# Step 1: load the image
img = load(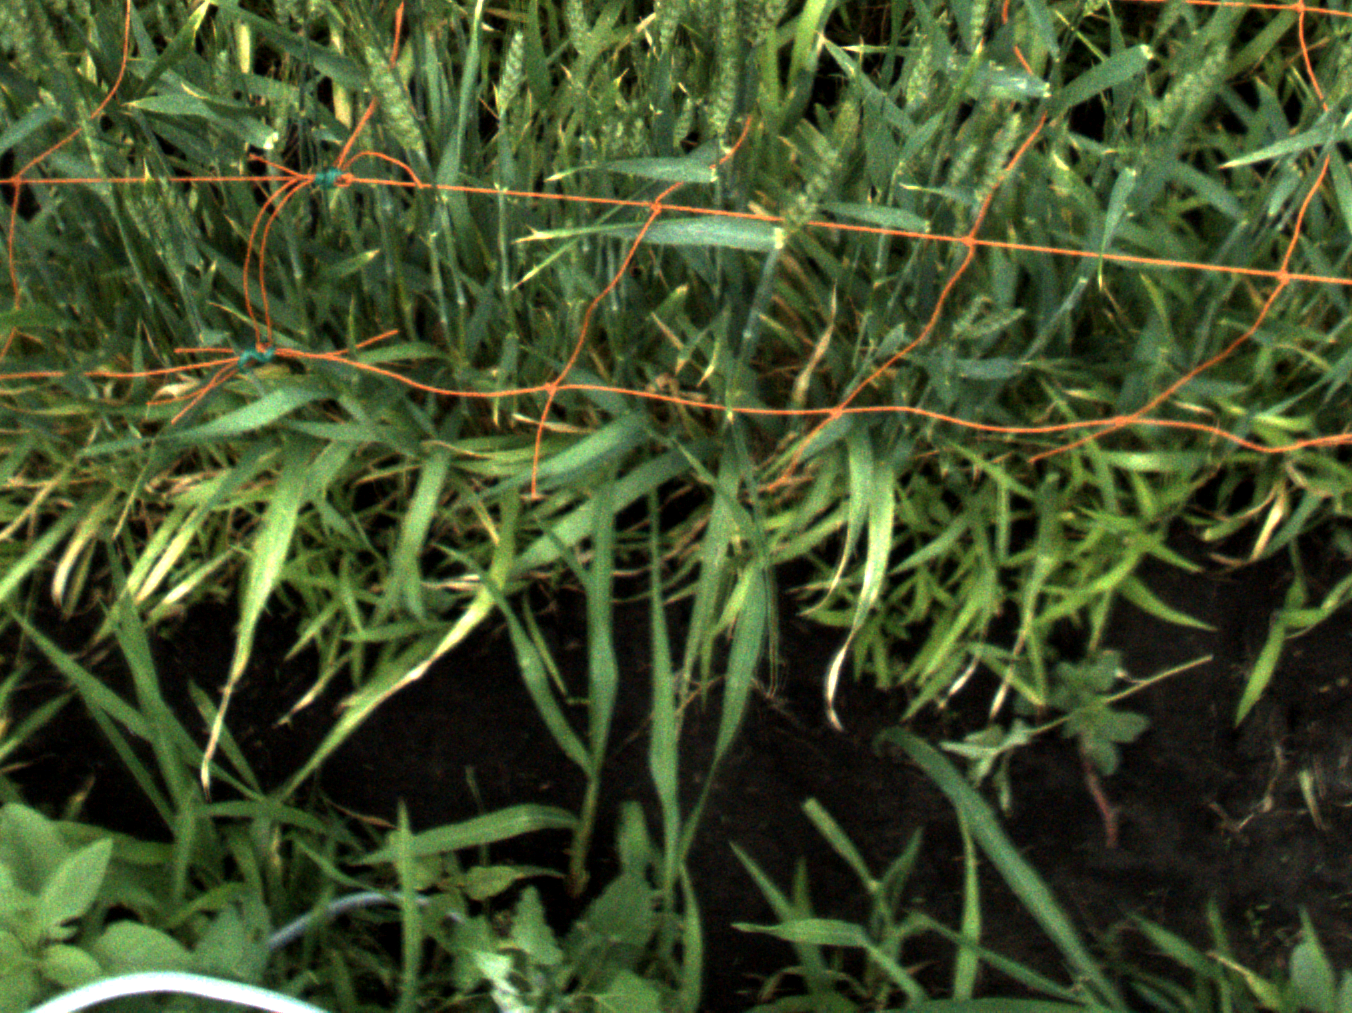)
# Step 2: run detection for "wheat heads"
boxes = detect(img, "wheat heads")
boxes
[1157,0,1187,38]
[495,27,526,113]
[1149,73,1196,125]
[749,0,810,46]
[971,111,1021,202]
[738,0,761,38]
[362,42,426,156]
[943,51,956,74]
[568,76,586,115]
[904,43,933,108]
[271,0,289,28]
[74,92,106,173]
[0,0,31,28]
[1342,41,1352,82]
[609,120,627,155]
[626,29,643,66]
[624,117,645,159]
[652,0,667,24]
[973,307,1026,338]
[31,0,67,75]
[830,98,859,157]
[210,49,231,98]
[159,240,184,278]
[655,0,685,50]
[709,61,739,135]
[597,120,613,141]
[1336,0,1352,68]
[509,98,527,150]
[712,0,736,65]
[1183,40,1229,116]
[9,36,42,76]
[691,0,711,35]
[160,185,195,225]
[36,87,63,118]
[669,96,696,141]
[946,140,981,183]
[564,0,586,55]
[950,298,982,337]
[122,196,151,240]
[968,0,999,48]
[781,149,846,234]
[139,197,167,235]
